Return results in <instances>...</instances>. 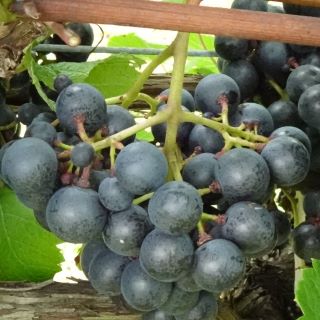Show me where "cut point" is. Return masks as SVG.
Wrapping results in <instances>:
<instances>
[{
	"instance_id": "1",
	"label": "cut point",
	"mask_w": 320,
	"mask_h": 320,
	"mask_svg": "<svg viewBox=\"0 0 320 320\" xmlns=\"http://www.w3.org/2000/svg\"><path fill=\"white\" fill-rule=\"evenodd\" d=\"M190 32L178 31L175 42L156 57L145 71L142 73L133 89L124 100L120 107L129 111L132 106L140 88L149 77V75L167 58L174 56V66L168 96V102L166 108L152 118L132 125L124 130H121L97 143L92 138L87 136L83 123L79 119H74L77 132L84 142L92 145L93 152L110 146V161H111V176L115 175V149L123 150L124 144L118 142L123 140L151 125L167 122L166 134L164 147L162 153L164 154L168 165L170 167L174 181H183L181 176L182 168L194 157L200 154L201 147L197 146L192 155L183 160L180 153L179 147L176 142L178 122L181 121H192L203 125L213 127L218 131L223 139L225 140L224 147L220 152L229 150L232 146L236 148H243V146L249 147L250 150L254 151L263 150L266 144L271 140L264 136L257 134V126L254 127L253 131H250L244 123L239 125L237 128L230 127L228 124V106L229 103L226 101L222 104V121L223 123L213 121L190 112H181L180 98L184 78L186 52L188 47ZM233 128V129H232Z\"/></svg>"
}]
</instances>
